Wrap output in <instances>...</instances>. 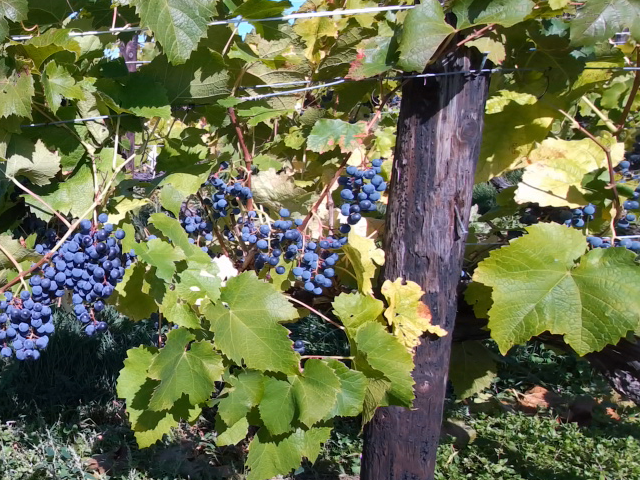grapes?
I'll use <instances>...</instances> for the list:
<instances>
[{
    "instance_id": "802abce8",
    "label": "grapes",
    "mask_w": 640,
    "mask_h": 480,
    "mask_svg": "<svg viewBox=\"0 0 640 480\" xmlns=\"http://www.w3.org/2000/svg\"><path fill=\"white\" fill-rule=\"evenodd\" d=\"M223 229H224V230H223V234H224L225 236H227V240H228V241H230V242H234V241H235V237H234V235L230 232L229 225H228V224H224V225H223Z\"/></svg>"
},
{
    "instance_id": "0513c4c2",
    "label": "grapes",
    "mask_w": 640,
    "mask_h": 480,
    "mask_svg": "<svg viewBox=\"0 0 640 480\" xmlns=\"http://www.w3.org/2000/svg\"><path fill=\"white\" fill-rule=\"evenodd\" d=\"M382 164L383 159L376 157L371 161L372 168L365 171L359 170L357 166H348L346 173L352 175L354 180L345 175H341L337 180L338 185H344V188L339 192L340 198L345 201H358V203H344L340 206V214L347 216V223L339 225L341 234L351 232V226H355L361 221V212L369 213L377 210V204L374 202L380 200V192L387 190V183L380 175Z\"/></svg>"
},
{
    "instance_id": "1ff8f66d",
    "label": "grapes",
    "mask_w": 640,
    "mask_h": 480,
    "mask_svg": "<svg viewBox=\"0 0 640 480\" xmlns=\"http://www.w3.org/2000/svg\"><path fill=\"white\" fill-rule=\"evenodd\" d=\"M59 241V236L55 229H48L46 231V241L44 243H37L35 250L40 254H47V252L55 246Z\"/></svg>"
},
{
    "instance_id": "84f90ec7",
    "label": "grapes",
    "mask_w": 640,
    "mask_h": 480,
    "mask_svg": "<svg viewBox=\"0 0 640 480\" xmlns=\"http://www.w3.org/2000/svg\"><path fill=\"white\" fill-rule=\"evenodd\" d=\"M211 183L219 192H216L212 195V207L214 210H219L218 212L212 213L213 219H218L220 216L225 217L227 215L226 206L228 205V201L224 198L225 193L232 196L231 204L233 206H238L239 202L237 198H240V202L243 205H246L247 199L254 198V194L251 192V187H243L240 183L226 184L223 179L214 178L205 181V185L209 186Z\"/></svg>"
},
{
    "instance_id": "f8a65327",
    "label": "grapes",
    "mask_w": 640,
    "mask_h": 480,
    "mask_svg": "<svg viewBox=\"0 0 640 480\" xmlns=\"http://www.w3.org/2000/svg\"><path fill=\"white\" fill-rule=\"evenodd\" d=\"M597 212L596 205L594 203H589L585 205L583 208H577L569 210H563L559 214V218L561 221H564L565 227L574 226L575 228H583L586 226V221L583 218H579V216L589 215L588 221H594V215Z\"/></svg>"
},
{
    "instance_id": "2adb6a1f",
    "label": "grapes",
    "mask_w": 640,
    "mask_h": 480,
    "mask_svg": "<svg viewBox=\"0 0 640 480\" xmlns=\"http://www.w3.org/2000/svg\"><path fill=\"white\" fill-rule=\"evenodd\" d=\"M238 223L243 222V226L241 227V240L243 242H249L250 244H255V247L261 250H266L268 248V241L266 239H258L256 234H252V231L256 230L255 224L249 220H245L243 217H239L237 219Z\"/></svg>"
},
{
    "instance_id": "e5b3c951",
    "label": "grapes",
    "mask_w": 640,
    "mask_h": 480,
    "mask_svg": "<svg viewBox=\"0 0 640 480\" xmlns=\"http://www.w3.org/2000/svg\"><path fill=\"white\" fill-rule=\"evenodd\" d=\"M282 256V250L280 248H274L272 250V257H269L268 254L256 252L253 255V267L255 269H261L265 265V261H268V264L272 267H276L280 262V258ZM275 272L278 275H283L286 273V269L283 265H279L275 268Z\"/></svg>"
},
{
    "instance_id": "b958b902",
    "label": "grapes",
    "mask_w": 640,
    "mask_h": 480,
    "mask_svg": "<svg viewBox=\"0 0 640 480\" xmlns=\"http://www.w3.org/2000/svg\"><path fill=\"white\" fill-rule=\"evenodd\" d=\"M303 224V220L301 218H296L293 221L287 220H276L275 222H271L269 225L262 224L259 227V235L261 238H266L270 235V228L276 230H283L285 233L278 232L277 233V242L282 243L284 239L287 241H296V245H288L287 251L285 252V259L289 261L295 260V254L298 253L299 249L303 248V259L302 263H298L297 267L291 269V274L295 277H301L304 281L302 284V289L306 292L312 293L316 296L323 295V287L331 288L333 286V281L331 278L336 276L335 265L336 262L340 261V255L336 252L329 250H320L319 253H316L314 250L317 249V243L314 241H309L303 247V239L304 235L301 234L300 230L291 229L294 226L300 227ZM321 259L323 261L320 262V266L323 268V273L314 275V282H311L313 272L317 268V260Z\"/></svg>"
},
{
    "instance_id": "ef6de9ee",
    "label": "grapes",
    "mask_w": 640,
    "mask_h": 480,
    "mask_svg": "<svg viewBox=\"0 0 640 480\" xmlns=\"http://www.w3.org/2000/svg\"><path fill=\"white\" fill-rule=\"evenodd\" d=\"M348 242V236H340L336 238L334 235H327L326 239H321L318 242V247L320 249H339Z\"/></svg>"
},
{
    "instance_id": "5460f4e3",
    "label": "grapes",
    "mask_w": 640,
    "mask_h": 480,
    "mask_svg": "<svg viewBox=\"0 0 640 480\" xmlns=\"http://www.w3.org/2000/svg\"><path fill=\"white\" fill-rule=\"evenodd\" d=\"M635 140L637 142L633 144L634 152L623 154L625 160L619 163V169L624 176L630 177L632 180H639L640 174H633V170L640 169V132L636 134Z\"/></svg>"
},
{
    "instance_id": "91a60905",
    "label": "grapes",
    "mask_w": 640,
    "mask_h": 480,
    "mask_svg": "<svg viewBox=\"0 0 640 480\" xmlns=\"http://www.w3.org/2000/svg\"><path fill=\"white\" fill-rule=\"evenodd\" d=\"M585 241L589 244L592 245L594 247H611L612 243L610 240H606L604 241V239L602 237L599 236H588L585 238Z\"/></svg>"
},
{
    "instance_id": "dcf779d0",
    "label": "grapes",
    "mask_w": 640,
    "mask_h": 480,
    "mask_svg": "<svg viewBox=\"0 0 640 480\" xmlns=\"http://www.w3.org/2000/svg\"><path fill=\"white\" fill-rule=\"evenodd\" d=\"M614 246L616 248L625 247L626 249L639 250L640 249V241L631 240V239H622L621 241L615 240L614 241Z\"/></svg>"
},
{
    "instance_id": "83cd7487",
    "label": "grapes",
    "mask_w": 640,
    "mask_h": 480,
    "mask_svg": "<svg viewBox=\"0 0 640 480\" xmlns=\"http://www.w3.org/2000/svg\"><path fill=\"white\" fill-rule=\"evenodd\" d=\"M182 224L184 225V229L188 233H194L203 230L205 232L203 238L206 241L212 242L214 240V236L212 234L213 225L210 222H203L202 218L199 215H194L193 217L183 216Z\"/></svg>"
},
{
    "instance_id": "01657485",
    "label": "grapes",
    "mask_w": 640,
    "mask_h": 480,
    "mask_svg": "<svg viewBox=\"0 0 640 480\" xmlns=\"http://www.w3.org/2000/svg\"><path fill=\"white\" fill-rule=\"evenodd\" d=\"M99 223H106L104 229L96 232L91 230L92 222L85 219L80 222L78 231L71 234L67 242L59 247V250L51 256V262L42 266L43 275H31L28 285L31 293L21 290L19 297L22 300L20 309L10 305L13 293L6 291L3 300H0V323H5L8 319L10 326L5 330L0 328V342L7 338L12 340V347L0 344V355L10 357L13 348L16 349V358L32 360L40 358L37 349H45L49 345V335L55 331L53 323V313L50 306L51 299L63 297L65 295L64 286L73 289L72 303L75 304L74 312L79 321L88 323L90 321L89 311L83 305L94 302V309L102 311L104 301L113 296L115 285L122 280L124 270L132 264L131 257H136L137 253L130 248L124 254V266H121V259L118 257L120 247L117 240H124L126 232L123 229L115 231V238L109 237L113 233L114 225L108 222V215L100 213L97 216ZM37 336L34 339H26L31 334V329Z\"/></svg>"
},
{
    "instance_id": "54f908b8",
    "label": "grapes",
    "mask_w": 640,
    "mask_h": 480,
    "mask_svg": "<svg viewBox=\"0 0 640 480\" xmlns=\"http://www.w3.org/2000/svg\"><path fill=\"white\" fill-rule=\"evenodd\" d=\"M633 198L636 200H626L623 202V209H640V202L637 201L640 199V186H637L635 191L633 192Z\"/></svg>"
}]
</instances>
